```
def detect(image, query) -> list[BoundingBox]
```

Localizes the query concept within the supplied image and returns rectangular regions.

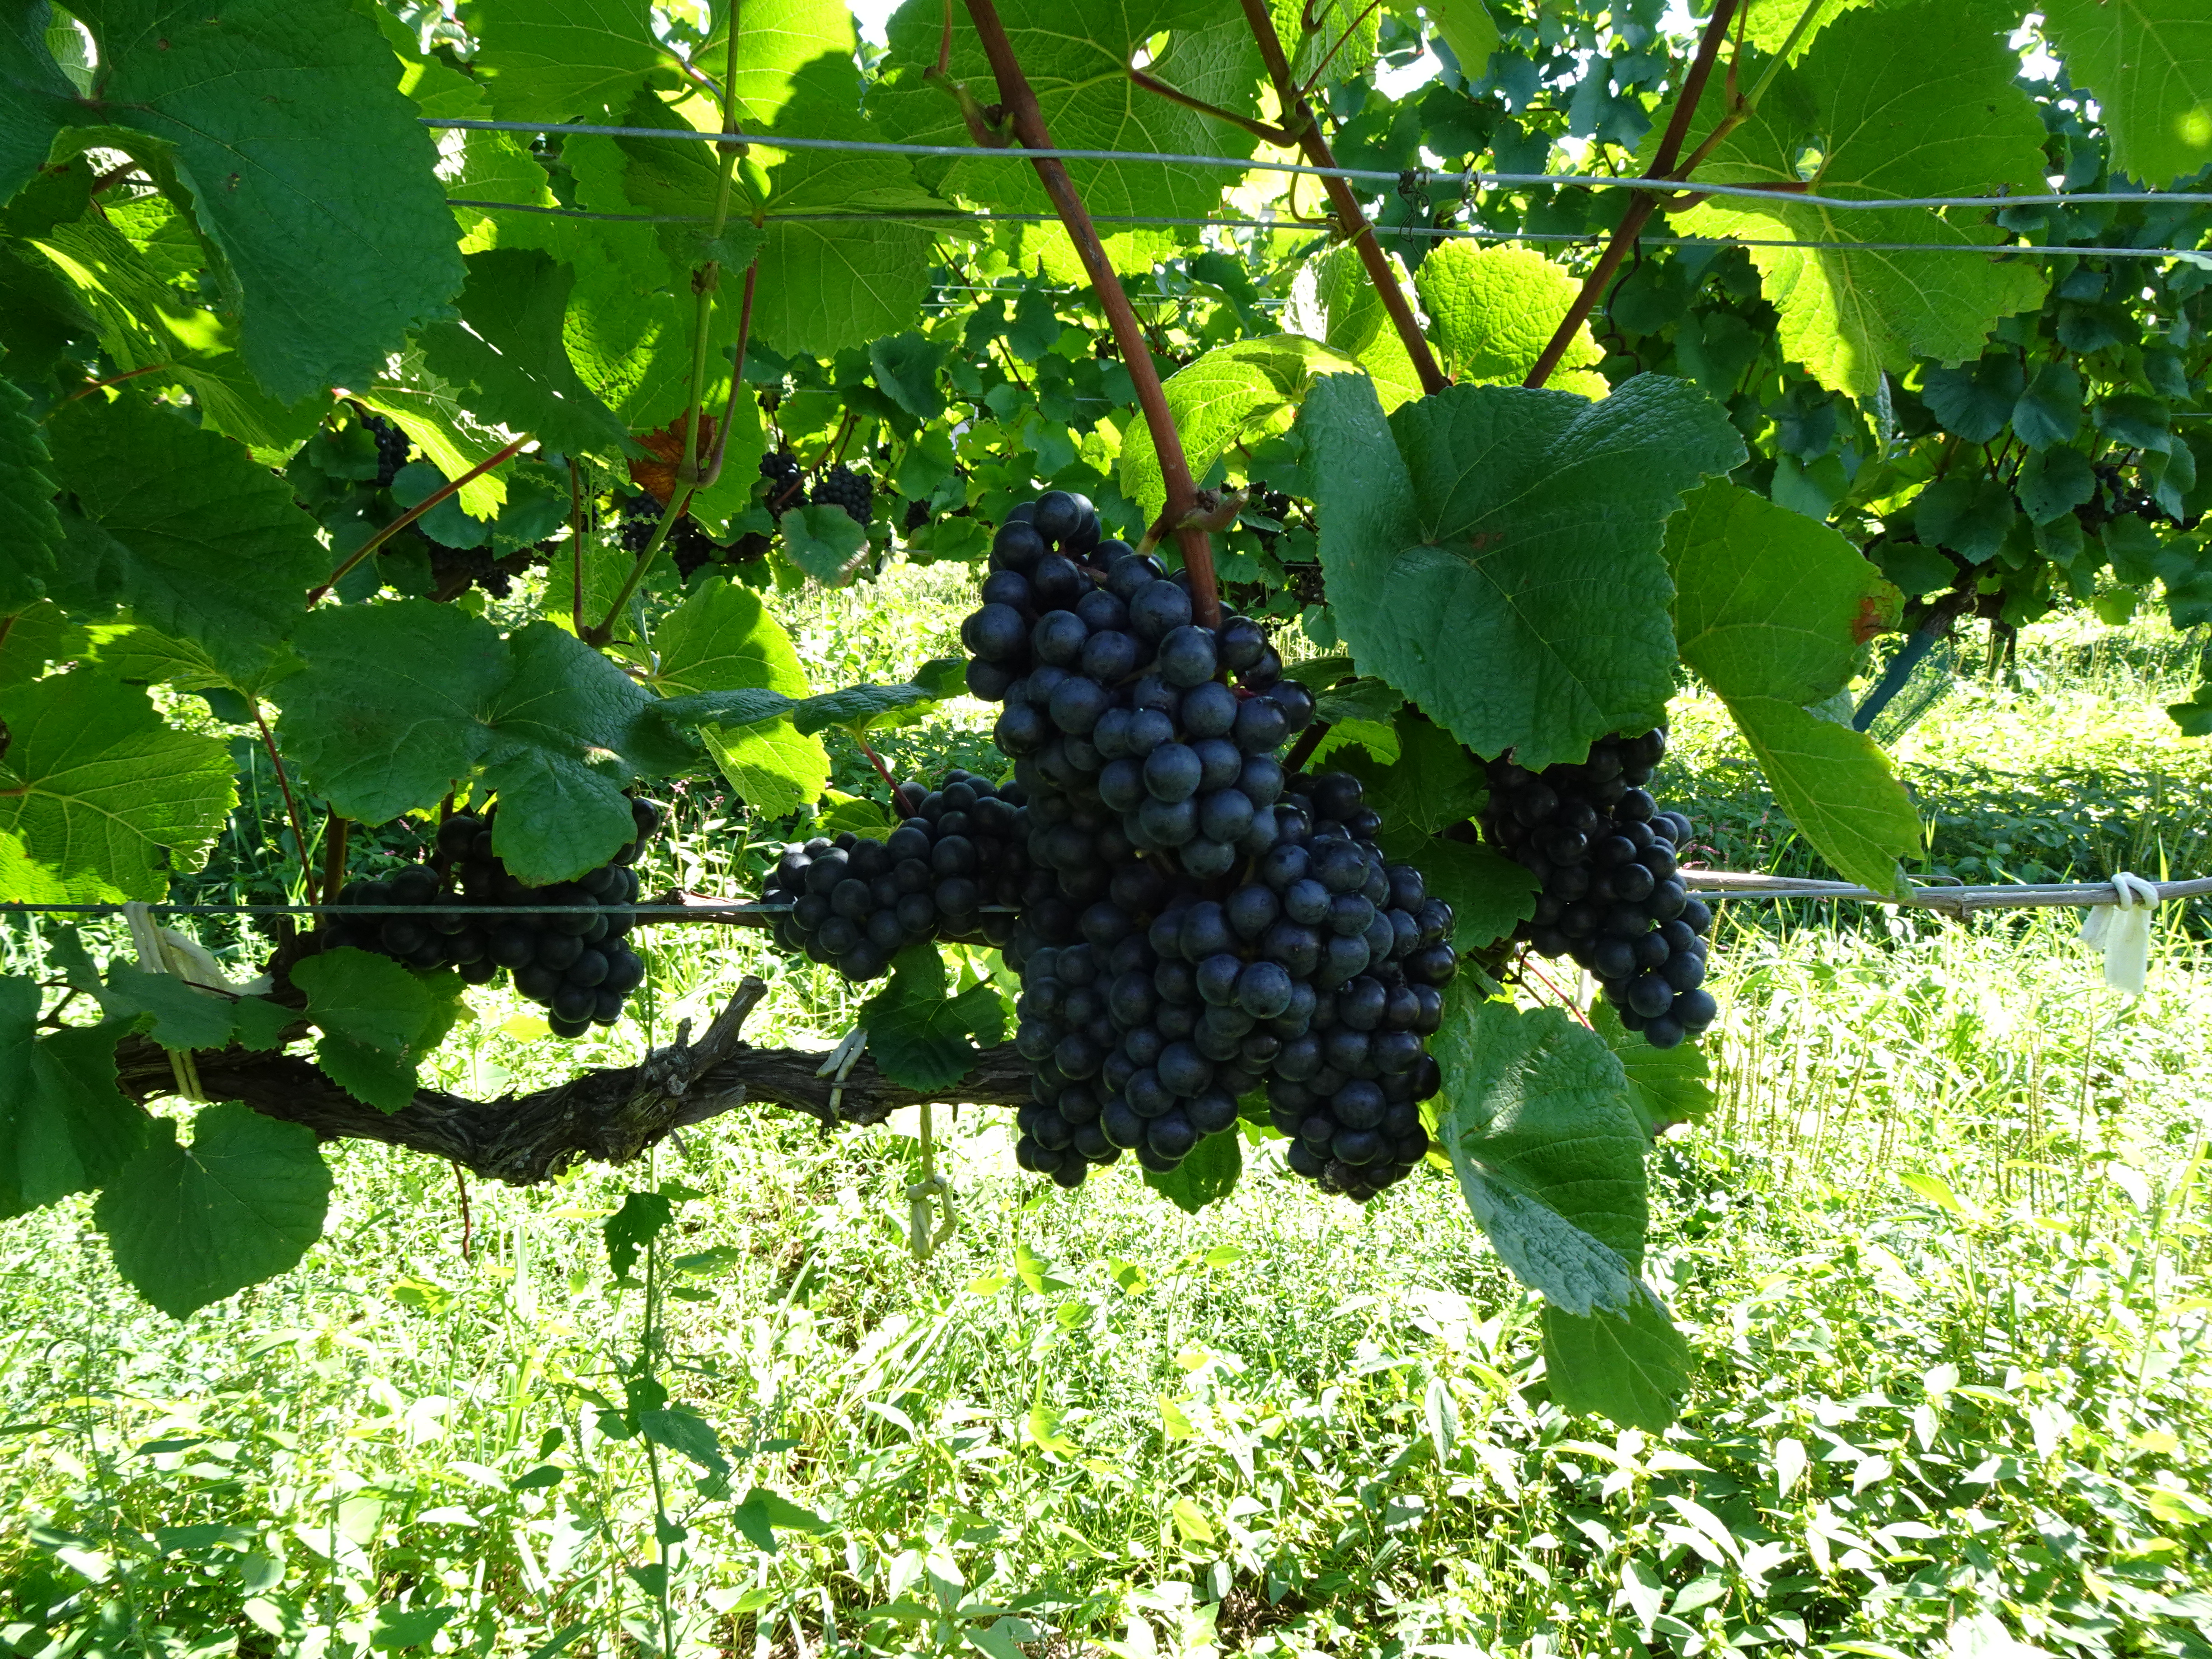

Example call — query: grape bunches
[1095,615,1317,878]
[1507,789,1717,1049]
[1265,860,1456,1204]
[438,785,661,1038]
[1472,722,1670,847]
[322,864,497,985]
[1433,816,1478,845]
[1015,946,1122,1189]
[1004,757,1167,973]
[1465,933,1518,1002]
[960,489,1238,816]
[1098,930,1285,1171]
[888,770,1038,945]
[1154,770,1382,1036]
[761,831,902,982]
